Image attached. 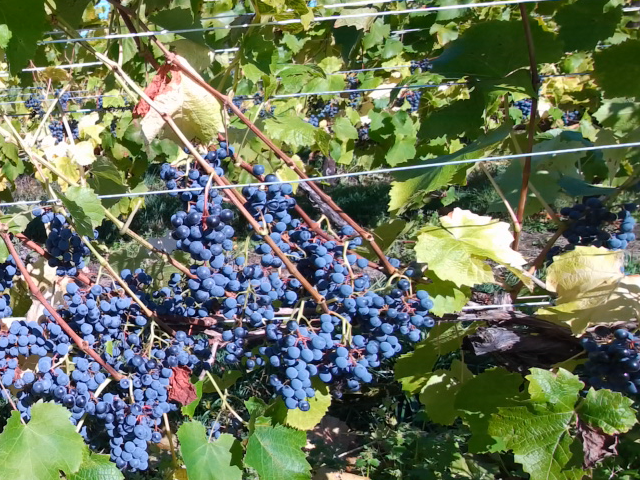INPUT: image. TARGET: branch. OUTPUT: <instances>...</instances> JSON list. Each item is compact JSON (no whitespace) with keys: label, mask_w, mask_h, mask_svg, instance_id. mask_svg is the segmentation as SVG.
<instances>
[{"label":"branch","mask_w":640,"mask_h":480,"mask_svg":"<svg viewBox=\"0 0 640 480\" xmlns=\"http://www.w3.org/2000/svg\"><path fill=\"white\" fill-rule=\"evenodd\" d=\"M150 40L158 49L161 50L165 57L178 68H180L194 84L226 103L231 108V110L235 114H237L240 119L251 129L256 137H258L266 146H268L271 150L279 155L283 163L292 172L297 174L300 178H308L307 174L289 159V156L285 153V151L281 147L276 145L273 141L268 139V137L259 130V128L253 123V121L235 104V102L230 97L199 79L185 63L180 61L169 51V49L163 42L158 39L157 36L150 37Z\"/></svg>","instance_id":"30e6481e"},{"label":"branch","mask_w":640,"mask_h":480,"mask_svg":"<svg viewBox=\"0 0 640 480\" xmlns=\"http://www.w3.org/2000/svg\"><path fill=\"white\" fill-rule=\"evenodd\" d=\"M1 237L3 238L4 243L6 244V247L8 249L9 254L12 256V258L15 260L16 266L19 270V272L21 273V275L23 276L25 282L27 283V286L30 290V292L32 293V295L38 300L40 301L48 310L49 312L55 316L58 320V322L60 323V325L62 326V328L74 339L76 340L75 345L78 346L86 355H92L95 359H97V361L100 363V365L104 368V370L111 376H113L114 378H116L118 381L121 380H129L130 376L129 375H124L121 374L119 375L116 371H113L104 361V359L94 350L92 349L86 342L82 341L81 338L78 336L77 333H75L65 322V320L63 319V317L51 306V304L45 300L39 293L37 286L31 281V279L29 278V275L27 274V272L25 271V269L22 266L21 260L19 258V256L16 254V252L14 251L10 240L8 239V236L5 232L1 233Z\"/></svg>","instance_id":"45aa463d"},{"label":"branch","mask_w":640,"mask_h":480,"mask_svg":"<svg viewBox=\"0 0 640 480\" xmlns=\"http://www.w3.org/2000/svg\"><path fill=\"white\" fill-rule=\"evenodd\" d=\"M531 103V117H530V135L527 150L532 152L535 148L537 138V119H538V100L532 98Z\"/></svg>","instance_id":"a944a4c4"},{"label":"branch","mask_w":640,"mask_h":480,"mask_svg":"<svg viewBox=\"0 0 640 480\" xmlns=\"http://www.w3.org/2000/svg\"><path fill=\"white\" fill-rule=\"evenodd\" d=\"M521 19L524 25V32L526 35V41L528 46V55H529V63H530V80L532 83V89L537 91L539 89V82L537 77V61H536V53H535V43L533 39V33L531 30V23L528 16V12L526 7L523 4L518 6Z\"/></svg>","instance_id":"1af6ec82"},{"label":"branch","mask_w":640,"mask_h":480,"mask_svg":"<svg viewBox=\"0 0 640 480\" xmlns=\"http://www.w3.org/2000/svg\"><path fill=\"white\" fill-rule=\"evenodd\" d=\"M56 208L60 213V216L66 220V223L72 228V230L80 237L84 240V242L89 246L93 256L95 257V259L102 265L104 266L106 269H108L113 275H115V277L119 280L120 284L124 287V289L127 291V293L130 295V297L136 301L138 303V305L141 307V309L147 313L148 315H150L159 325H161L170 335L174 334V330L167 325L155 312H153L150 308H148L143 300L138 297L134 291L132 290V288L128 285V283L125 281V279L123 278V276L111 265L109 264L107 261H105L97 252L94 243L89 239V237L87 235H85L71 220L70 216L67 215L61 205V203H56Z\"/></svg>","instance_id":"ea751061"},{"label":"branch","mask_w":640,"mask_h":480,"mask_svg":"<svg viewBox=\"0 0 640 480\" xmlns=\"http://www.w3.org/2000/svg\"><path fill=\"white\" fill-rule=\"evenodd\" d=\"M530 166H531V160L529 158H526L524 160V164L522 168L520 187H519L518 196H517V205H516L515 214H514V227H513V239H512V250L514 252H517L519 250L521 217H522V210L524 207V198H525V193H526L527 184H528Z\"/></svg>","instance_id":"1d269e1b"},{"label":"branch","mask_w":640,"mask_h":480,"mask_svg":"<svg viewBox=\"0 0 640 480\" xmlns=\"http://www.w3.org/2000/svg\"><path fill=\"white\" fill-rule=\"evenodd\" d=\"M104 213L108 217H110L111 219H113L115 221V223L120 227V229L123 231V233L125 235H127L129 237H132L133 239L137 240L144 247H146L149 251H151L155 255H158V256L162 257L169 265H171L173 268L181 271L185 275H188V277H191V279H197V275L191 274L190 273V269L188 267H186L185 265H183L180 262H178L175 259H173L166 251H164L163 249L158 248L155 245H153L151 242L146 240L143 236H141L135 230H132V229L128 228V226L124 223L122 218L120 216H118L113 210H111L110 208H106L104 210Z\"/></svg>","instance_id":"ca6c30ca"},{"label":"branch","mask_w":640,"mask_h":480,"mask_svg":"<svg viewBox=\"0 0 640 480\" xmlns=\"http://www.w3.org/2000/svg\"><path fill=\"white\" fill-rule=\"evenodd\" d=\"M522 287H523V284H522L521 282L516 283V284L512 287L511 291H509V292L506 294V297H507L508 299H512V298H514V297L517 295L518 291H519Z\"/></svg>","instance_id":"46de074c"},{"label":"branch","mask_w":640,"mask_h":480,"mask_svg":"<svg viewBox=\"0 0 640 480\" xmlns=\"http://www.w3.org/2000/svg\"><path fill=\"white\" fill-rule=\"evenodd\" d=\"M81 44L88 51L98 57L101 61L113 68L128 85L135 89V92L138 94L141 100L160 115L163 122L174 131V134L176 136L180 137L187 149L198 159L203 168L213 177L216 182H218L219 184L231 183V180L228 177L220 176V174L209 164L204 155L193 145L189 137L182 130H180V127L175 122L170 119L166 111L158 103L154 102L150 97H148L144 90L140 88V85L136 81H134L118 63L112 60L109 56L103 54L89 41H82Z\"/></svg>","instance_id":"325d2c04"},{"label":"branch","mask_w":640,"mask_h":480,"mask_svg":"<svg viewBox=\"0 0 640 480\" xmlns=\"http://www.w3.org/2000/svg\"><path fill=\"white\" fill-rule=\"evenodd\" d=\"M232 158L237 163H239L246 171H249V173L256 177L259 181H264L265 175H255L254 171L252 170V166L243 157L239 156L237 153H234L232 155Z\"/></svg>","instance_id":"7c5c6f52"},{"label":"branch","mask_w":640,"mask_h":480,"mask_svg":"<svg viewBox=\"0 0 640 480\" xmlns=\"http://www.w3.org/2000/svg\"><path fill=\"white\" fill-rule=\"evenodd\" d=\"M17 236L23 241L25 242V244L29 247H31L36 253H38L40 256L47 258V259H51L52 255L48 253V250L45 248H42L41 246L35 244L30 238H28L27 236H25L21 231L17 232Z\"/></svg>","instance_id":"afce2bb1"},{"label":"branch","mask_w":640,"mask_h":480,"mask_svg":"<svg viewBox=\"0 0 640 480\" xmlns=\"http://www.w3.org/2000/svg\"><path fill=\"white\" fill-rule=\"evenodd\" d=\"M3 118H4V123L6 124V127L8 128L9 132H7L4 128H0V135H2L5 139H7L14 146H17L20 143V145L22 147H24V149L28 153V156H29V159H30V163L32 165V168H33L36 176L40 180L41 184L45 187V189L48 192L50 198H57V197L55 196L53 190L51 189L50 185L48 184V182L46 181L44 176L41 174L36 161L40 162V163L44 164L45 166H47L48 168H50L59 178H61L63 181H65L67 184H69L73 188H77L79 186V183L75 179L71 178L69 175L64 173L52 161H50L49 159H47L46 157H44L42 155H39L36 152H33L31 147L24 141V137H21L18 134V132L15 130L13 125L10 123L9 118H8V112H4L3 113Z\"/></svg>","instance_id":"982ccf7c"},{"label":"branch","mask_w":640,"mask_h":480,"mask_svg":"<svg viewBox=\"0 0 640 480\" xmlns=\"http://www.w3.org/2000/svg\"><path fill=\"white\" fill-rule=\"evenodd\" d=\"M294 210L302 217L314 233L325 237L329 242H336V245H343V242H337V239H334V236L328 230L318 227L309 214L299 204L294 206Z\"/></svg>","instance_id":"8bde2521"},{"label":"branch","mask_w":640,"mask_h":480,"mask_svg":"<svg viewBox=\"0 0 640 480\" xmlns=\"http://www.w3.org/2000/svg\"><path fill=\"white\" fill-rule=\"evenodd\" d=\"M308 185L321 197L325 202L329 204V206L334 210L335 214L339 216L342 220L349 223V225L355 228L364 238L366 239L368 245L374 249L376 258L379 262L384 266H380L373 261L368 263V267L373 271L380 273L381 275H386L388 272L392 273L394 271L393 265L385 258L382 253L381 247L375 242L372 235L362 227L352 216L344 213L340 206L335 202V200L329 196L322 188L315 183H308Z\"/></svg>","instance_id":"1ff4a987"},{"label":"branch","mask_w":640,"mask_h":480,"mask_svg":"<svg viewBox=\"0 0 640 480\" xmlns=\"http://www.w3.org/2000/svg\"><path fill=\"white\" fill-rule=\"evenodd\" d=\"M223 193L231 200V202L237 207L239 212L248 220L251 227L261 236L262 240L267 243V246L271 248L277 256L284 262L285 266L296 276L299 282L304 288L314 296V298L320 303L323 311L329 313L330 309L326 304V300L322 297L318 290L311 285V283L299 272L298 268L291 262L286 256L284 251L274 243V239L270 237L267 232L256 222L254 216L243 205L247 202V199L239 194V192L232 188L224 189Z\"/></svg>","instance_id":"170604dd"},{"label":"branch","mask_w":640,"mask_h":480,"mask_svg":"<svg viewBox=\"0 0 640 480\" xmlns=\"http://www.w3.org/2000/svg\"><path fill=\"white\" fill-rule=\"evenodd\" d=\"M572 224H573V221L571 219H567L557 229H555L550 234V236L546 239V241L543 243V245L541 246V248L537 252V255L535 256V260L530 265L529 270L531 272H534L539 267V264L542 262V258L544 257V255H545L546 251L548 250V248L550 247V245L556 240V238L560 234H562Z\"/></svg>","instance_id":"2b1400db"}]
</instances>
